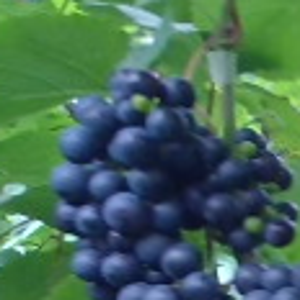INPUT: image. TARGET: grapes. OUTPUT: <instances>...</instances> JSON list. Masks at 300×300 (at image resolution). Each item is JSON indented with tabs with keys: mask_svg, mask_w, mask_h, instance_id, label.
Masks as SVG:
<instances>
[{
	"mask_svg": "<svg viewBox=\"0 0 300 300\" xmlns=\"http://www.w3.org/2000/svg\"><path fill=\"white\" fill-rule=\"evenodd\" d=\"M112 98L72 99L51 189L53 220L78 239L69 266L91 282L92 300H213L218 284L182 230L203 227L248 254L266 242L289 245L295 224L271 219L263 232L243 230L265 195L255 182L291 186L290 171L268 150L238 160L221 137L197 122L198 89L189 78L141 66L117 70Z\"/></svg>",
	"mask_w": 300,
	"mask_h": 300,
	"instance_id": "01657485",
	"label": "grapes"
},
{
	"mask_svg": "<svg viewBox=\"0 0 300 300\" xmlns=\"http://www.w3.org/2000/svg\"><path fill=\"white\" fill-rule=\"evenodd\" d=\"M242 300H300V267L246 263L235 272Z\"/></svg>",
	"mask_w": 300,
	"mask_h": 300,
	"instance_id": "b958b902",
	"label": "grapes"
}]
</instances>
